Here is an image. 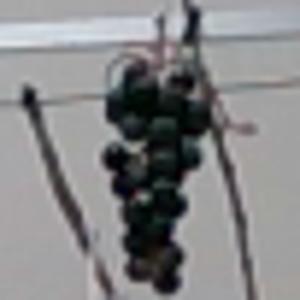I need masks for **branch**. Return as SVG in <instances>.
Here are the masks:
<instances>
[{"instance_id": "obj_2", "label": "branch", "mask_w": 300, "mask_h": 300, "mask_svg": "<svg viewBox=\"0 0 300 300\" xmlns=\"http://www.w3.org/2000/svg\"><path fill=\"white\" fill-rule=\"evenodd\" d=\"M16 105L34 134L51 198L55 201L63 222L68 226V233L73 237L75 247L83 258L90 280L104 300H127L121 288L115 284L112 272L108 270L107 257L95 244L84 207L73 191V185L67 180L66 170L61 165L60 153L55 148L54 138L47 126L39 88L30 80H22L18 84Z\"/></svg>"}, {"instance_id": "obj_1", "label": "branch", "mask_w": 300, "mask_h": 300, "mask_svg": "<svg viewBox=\"0 0 300 300\" xmlns=\"http://www.w3.org/2000/svg\"><path fill=\"white\" fill-rule=\"evenodd\" d=\"M185 23L178 35V46L192 50V62L201 71L196 84L199 97L208 99L213 106L214 124L208 133L215 149V162L226 192V204L233 221V237L238 254L240 280L243 282L244 300H261L256 282V260L250 250V217L245 207L243 186L238 181V166L233 160V149L226 143L225 129L219 120L220 91L214 86L213 72L202 59L204 8L196 0H179Z\"/></svg>"}]
</instances>
